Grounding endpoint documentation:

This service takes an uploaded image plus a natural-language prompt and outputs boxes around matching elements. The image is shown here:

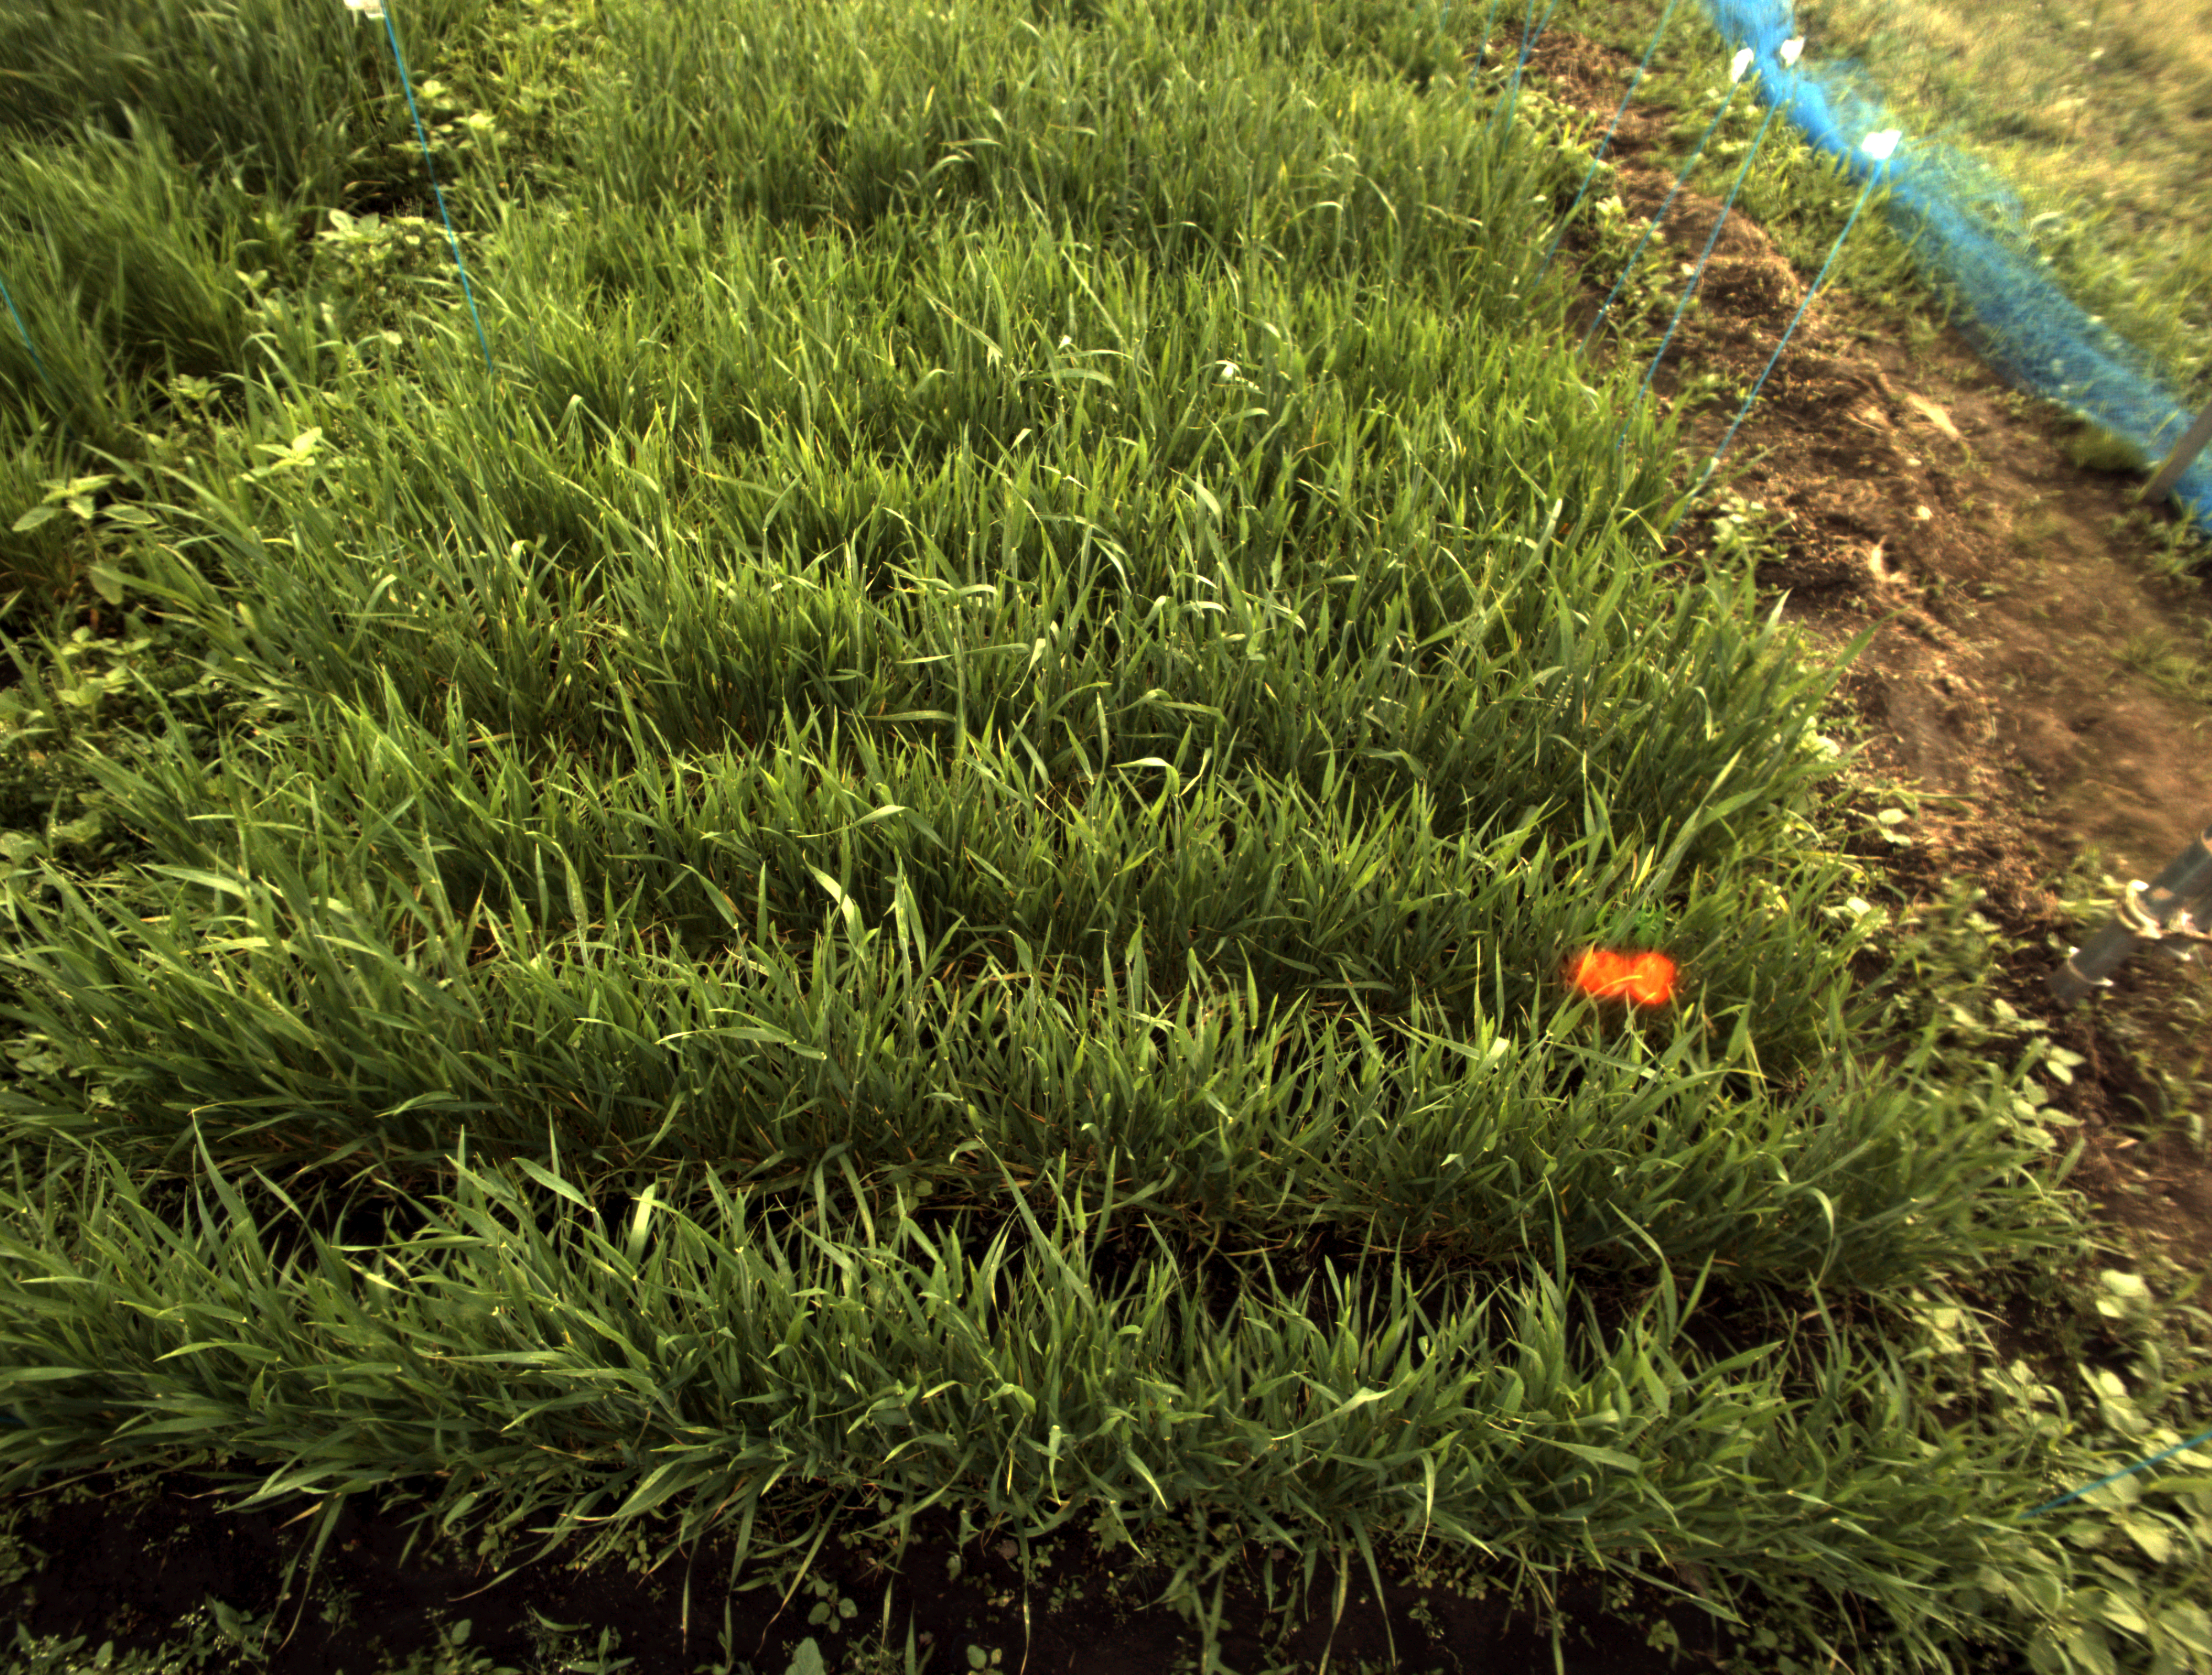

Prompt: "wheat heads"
[1414,695,1426,730]
[1133,257,1146,330]
[1573,616,1600,675]
[347,865,371,912]
[949,758,963,805]
[1714,678,1727,713]
[253,982,284,1016]
[1406,108,1420,165]
[1332,319,1347,347]
[1701,1070,1727,1103]
[1002,372,1008,408]
[1005,505,1014,533]
[1090,497,1098,517]
[1596,673,1619,705]
[571,876,587,939]
[1465,587,1487,633]
[1943,1106,1957,1131]
[952,604,963,636]
[1251,261,1259,291]
[276,945,303,983]
[873,1287,884,1306]
[1343,168,1355,208]
[1036,612,1044,638]
[1579,496,1595,535]
[1602,493,1626,539]
[916,588,927,627]
[1656,723,1680,760]
[1481,587,1513,640]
